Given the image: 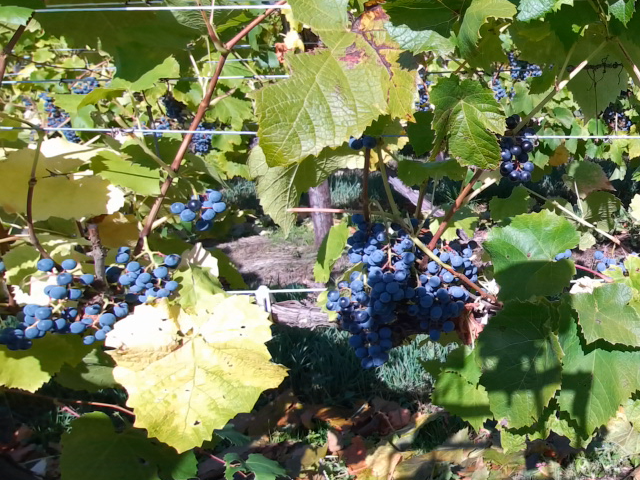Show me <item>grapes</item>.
Returning a JSON list of instances; mask_svg holds the SVG:
<instances>
[{"label":"grapes","instance_id":"grapes-10","mask_svg":"<svg viewBox=\"0 0 640 480\" xmlns=\"http://www.w3.org/2000/svg\"><path fill=\"white\" fill-rule=\"evenodd\" d=\"M348 145L352 149H374L377 146V141L369 135H363L361 139L351 137L348 141Z\"/></svg>","mask_w":640,"mask_h":480},{"label":"grapes","instance_id":"grapes-2","mask_svg":"<svg viewBox=\"0 0 640 480\" xmlns=\"http://www.w3.org/2000/svg\"><path fill=\"white\" fill-rule=\"evenodd\" d=\"M52 308L27 303L22 312L16 315L20 325L12 330L7 329L0 335V342L8 344L10 350H29L34 346V338H42L47 332L58 331L60 334L72 335L85 333L93 324L91 317H85L79 321L67 323L63 318L51 319Z\"/></svg>","mask_w":640,"mask_h":480},{"label":"grapes","instance_id":"grapes-6","mask_svg":"<svg viewBox=\"0 0 640 480\" xmlns=\"http://www.w3.org/2000/svg\"><path fill=\"white\" fill-rule=\"evenodd\" d=\"M433 252L458 271L463 267V274L471 281H477L479 279L477 266L470 261L473 255V247L470 244H465L459 252L452 250L450 253H447L440 247H435Z\"/></svg>","mask_w":640,"mask_h":480},{"label":"grapes","instance_id":"grapes-7","mask_svg":"<svg viewBox=\"0 0 640 480\" xmlns=\"http://www.w3.org/2000/svg\"><path fill=\"white\" fill-rule=\"evenodd\" d=\"M129 313V305L125 301H120L117 305L113 307L111 313H105L100 316L99 324L103 329H99L95 333V337L93 335H86L83 338V343L86 347H90L95 339L97 341H103L107 338V332L112 330L111 325L116 322V317H124Z\"/></svg>","mask_w":640,"mask_h":480},{"label":"grapes","instance_id":"grapes-8","mask_svg":"<svg viewBox=\"0 0 640 480\" xmlns=\"http://www.w3.org/2000/svg\"><path fill=\"white\" fill-rule=\"evenodd\" d=\"M58 285H47L44 288V294L54 300L63 301L65 297L68 300H78L81 297V291L78 288H70L66 290L63 286L72 282V275L68 272L59 273L56 276Z\"/></svg>","mask_w":640,"mask_h":480},{"label":"grapes","instance_id":"grapes-1","mask_svg":"<svg viewBox=\"0 0 640 480\" xmlns=\"http://www.w3.org/2000/svg\"><path fill=\"white\" fill-rule=\"evenodd\" d=\"M351 222L358 231L348 239L347 259L368 265L367 284L371 293L364 289L363 274L354 271L350 281L340 279L337 289L327 293L326 308L337 311L341 327L352 332L349 345L355 348L354 356L361 358V367L372 369L388 360L386 351L392 347L391 328L381 323L393 318L391 310L401 299L415 302L409 306L408 314L418 317L421 330H426L430 321L441 323L443 331L451 333L455 328L453 319L469 301L468 293L454 284V277L435 262H429L426 271L417 275L422 285L414 290L406 280L410 277V264L415 262V255L405 252L413 246L407 230L401 228L399 222H390L389 228L398 231L402 241L392 243L393 269L383 272L379 265L387 259V254L376 244L386 241L385 227L375 223L369 228L362 216H352Z\"/></svg>","mask_w":640,"mask_h":480},{"label":"grapes","instance_id":"grapes-9","mask_svg":"<svg viewBox=\"0 0 640 480\" xmlns=\"http://www.w3.org/2000/svg\"><path fill=\"white\" fill-rule=\"evenodd\" d=\"M594 257L597 260L601 261L596 265V270L598 272H605L608 269V266H612V267L617 266L622 272H625L627 270L626 264L624 262L622 261L617 262L614 258H611L610 256L606 257L603 251H596L594 253Z\"/></svg>","mask_w":640,"mask_h":480},{"label":"grapes","instance_id":"grapes-4","mask_svg":"<svg viewBox=\"0 0 640 480\" xmlns=\"http://www.w3.org/2000/svg\"><path fill=\"white\" fill-rule=\"evenodd\" d=\"M222 200V194L216 189H208L205 196L194 195L186 201H179L171 205L174 215H179L182 222H190L196 218V211L204 209L200 213V219L194 222V227L198 231L209 232L211 223L216 218V213H224L227 204Z\"/></svg>","mask_w":640,"mask_h":480},{"label":"grapes","instance_id":"grapes-5","mask_svg":"<svg viewBox=\"0 0 640 480\" xmlns=\"http://www.w3.org/2000/svg\"><path fill=\"white\" fill-rule=\"evenodd\" d=\"M520 146H511L508 148H502L500 150V174L506 176L509 182L516 183H528L533 179L534 164L532 162H525L523 167L519 171H515L514 163L510 161L512 155L520 156L522 150L524 152H530L534 147V142L530 139H522Z\"/></svg>","mask_w":640,"mask_h":480},{"label":"grapes","instance_id":"grapes-3","mask_svg":"<svg viewBox=\"0 0 640 480\" xmlns=\"http://www.w3.org/2000/svg\"><path fill=\"white\" fill-rule=\"evenodd\" d=\"M128 274H123L118 266H110L105 269V276L109 281L117 282L120 285H130L131 292L125 294L128 303L138 301L140 304L146 303L156 297L167 298L171 291L177 289L178 283L175 280L167 281L162 289H154L151 283V275L142 273L143 267L136 261H130L125 266Z\"/></svg>","mask_w":640,"mask_h":480}]
</instances>
